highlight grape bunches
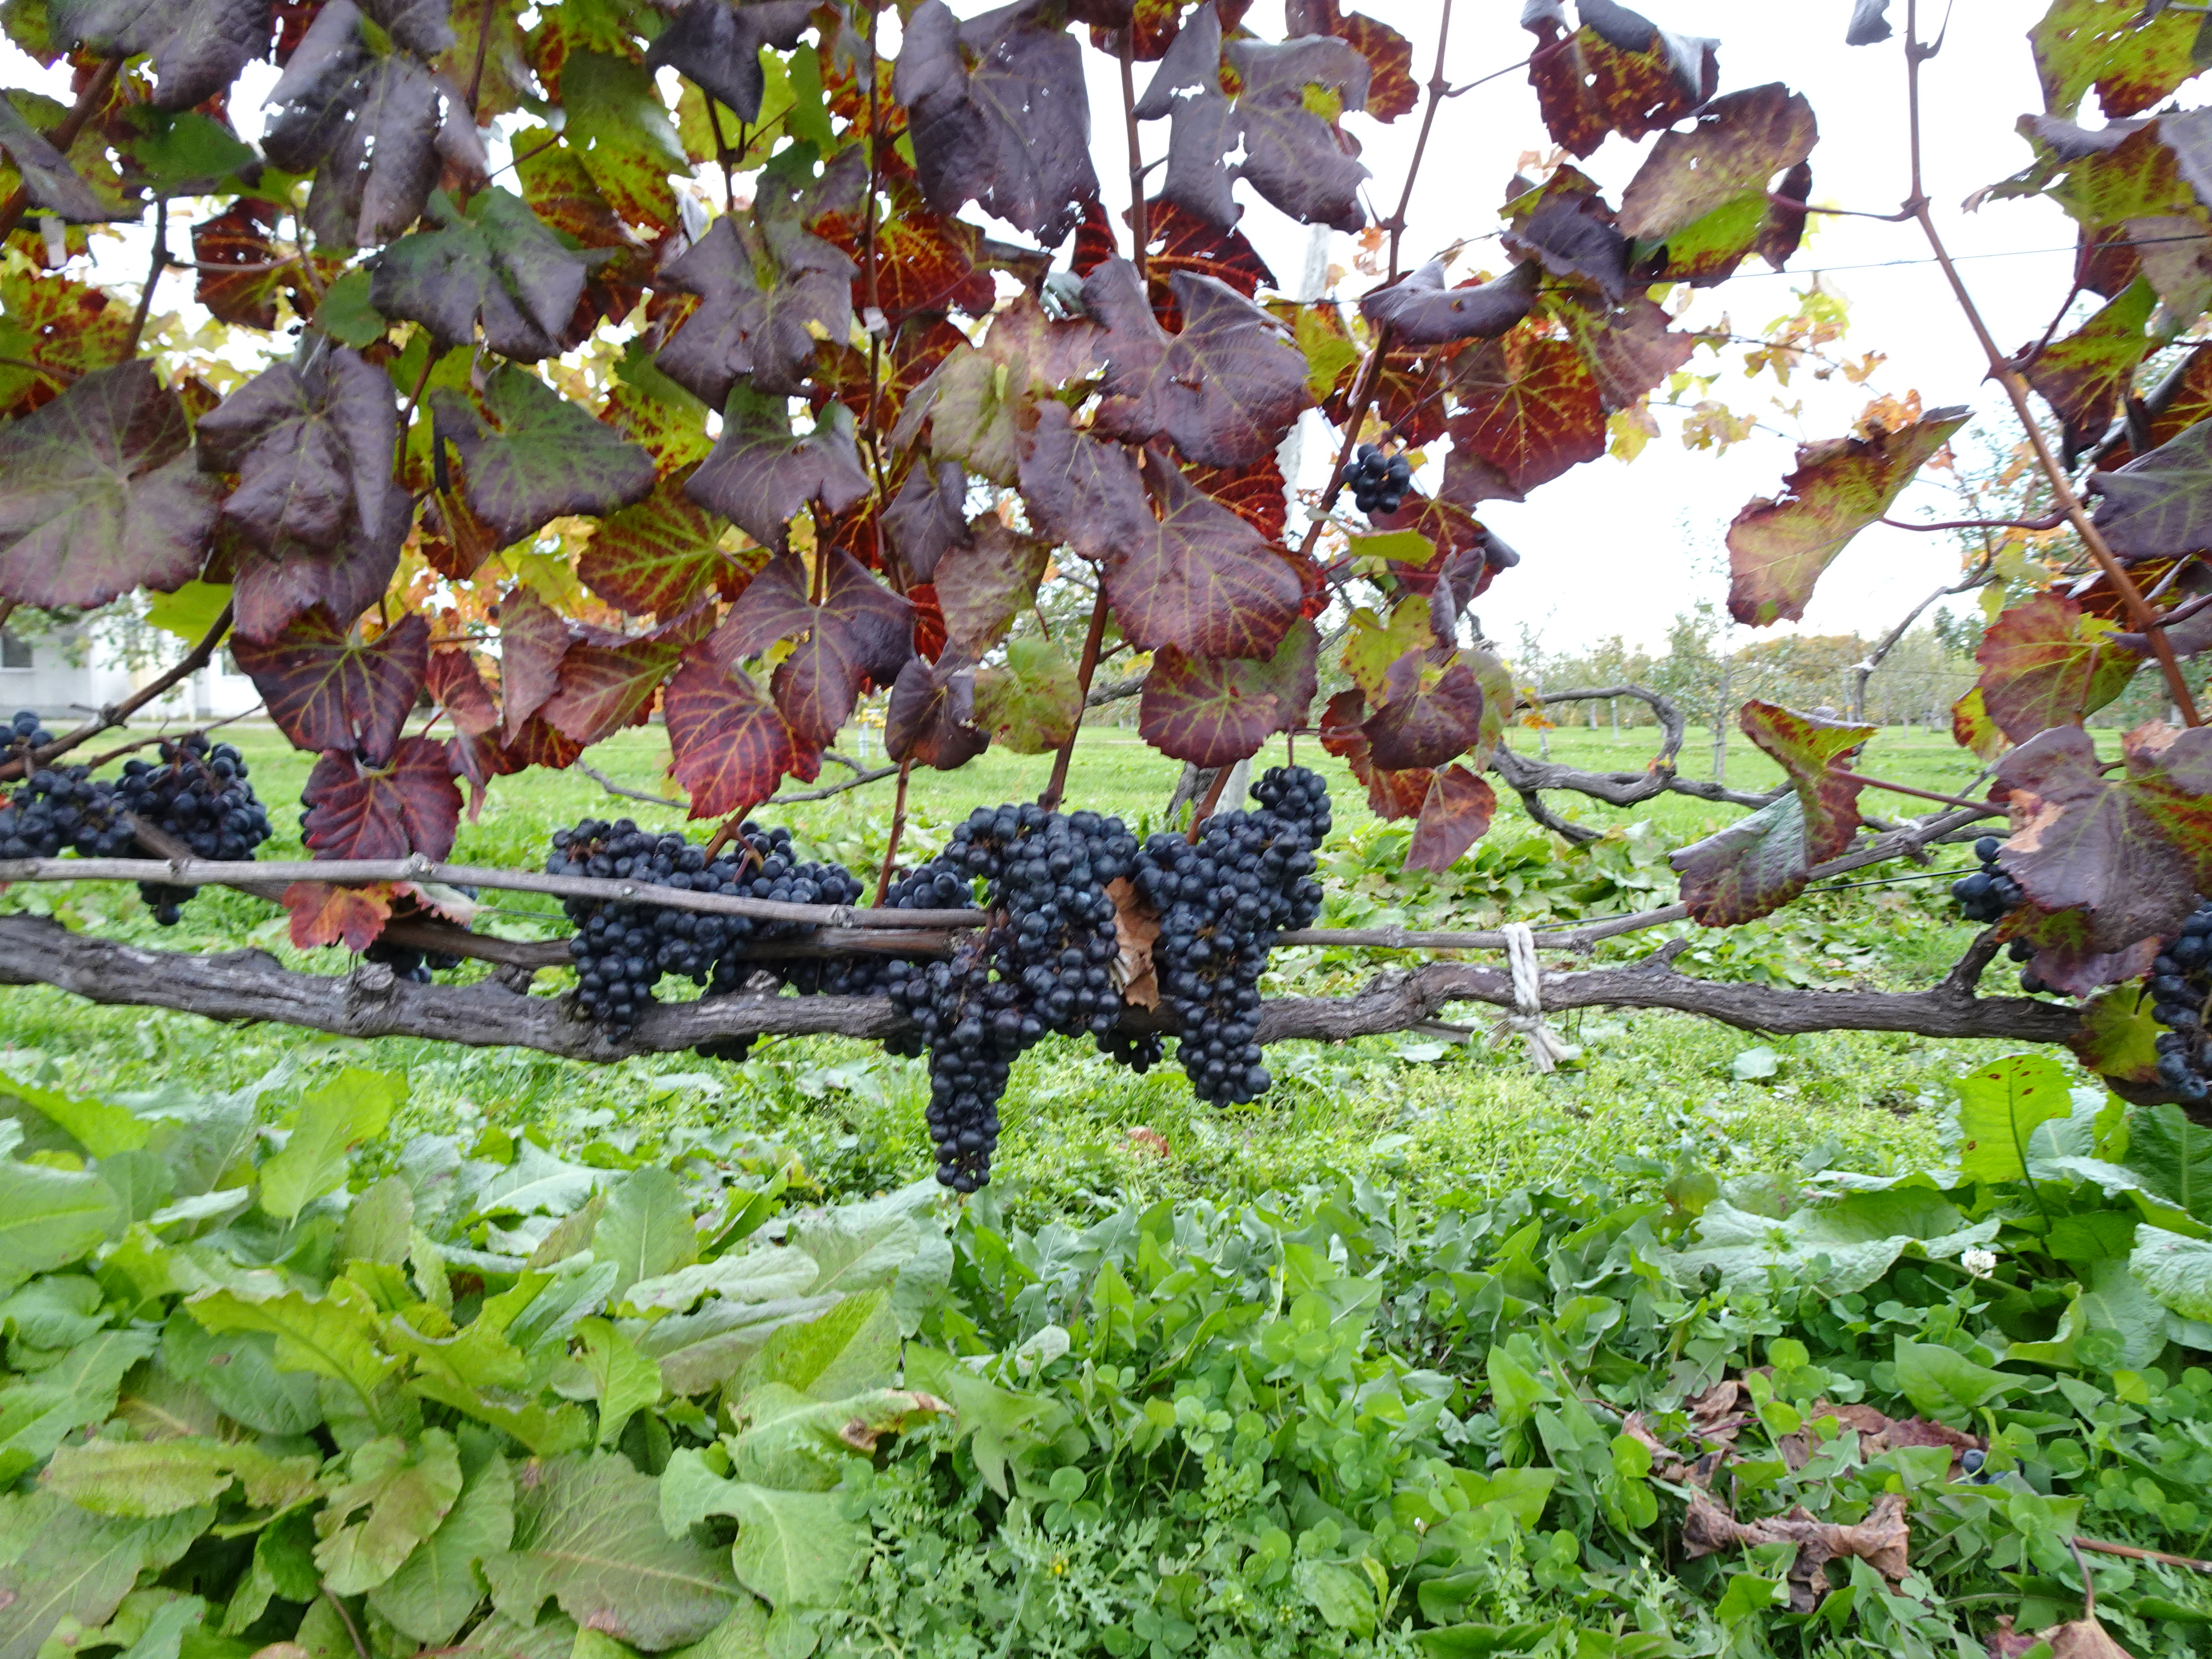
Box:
[998,814,1122,1040]
[1247,765,1331,930]
[545,818,658,930]
[324,929,345,950]
[111,731,273,925]
[1069,810,1141,886]
[785,861,865,995]
[884,1029,926,1059]
[425,880,480,969]
[1133,810,1307,1107]
[944,803,1046,879]
[569,901,662,1043]
[299,737,377,848]
[361,938,433,984]
[0,708,60,859]
[1095,1029,1162,1073]
[1950,837,2111,998]
[823,854,975,995]
[34,761,135,858]
[888,951,1048,1194]
[2152,909,2212,1102]
[1340,443,1411,514]
[695,820,814,1061]
[632,832,755,988]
